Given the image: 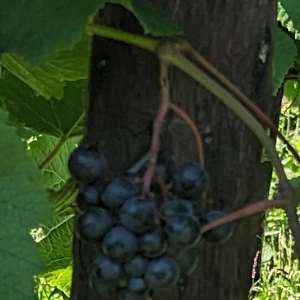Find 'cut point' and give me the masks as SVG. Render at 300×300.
<instances>
[{"label":"cut point","mask_w":300,"mask_h":300,"mask_svg":"<svg viewBox=\"0 0 300 300\" xmlns=\"http://www.w3.org/2000/svg\"><path fill=\"white\" fill-rule=\"evenodd\" d=\"M159 61L160 105L155 119L152 121V142L145 177L148 181L154 178L158 160L159 130L162 128L166 114L170 108L168 63Z\"/></svg>","instance_id":"6a23745f"}]
</instances>
